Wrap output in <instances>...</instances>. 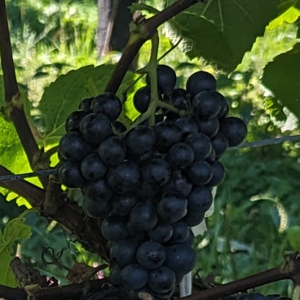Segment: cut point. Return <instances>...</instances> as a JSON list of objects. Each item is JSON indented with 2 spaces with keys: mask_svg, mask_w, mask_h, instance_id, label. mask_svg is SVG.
Segmentation results:
<instances>
[{
  "mask_svg": "<svg viewBox=\"0 0 300 300\" xmlns=\"http://www.w3.org/2000/svg\"><path fill=\"white\" fill-rule=\"evenodd\" d=\"M158 53H159V34L158 30L151 38V56L146 70L150 72V101L149 108L143 112L140 116L127 126L128 132L143 123L144 120L149 119L153 115V111L157 106H164V102L158 99L157 90V67H158Z\"/></svg>",
  "mask_w": 300,
  "mask_h": 300,
  "instance_id": "1",
  "label": "cut point"
}]
</instances>
